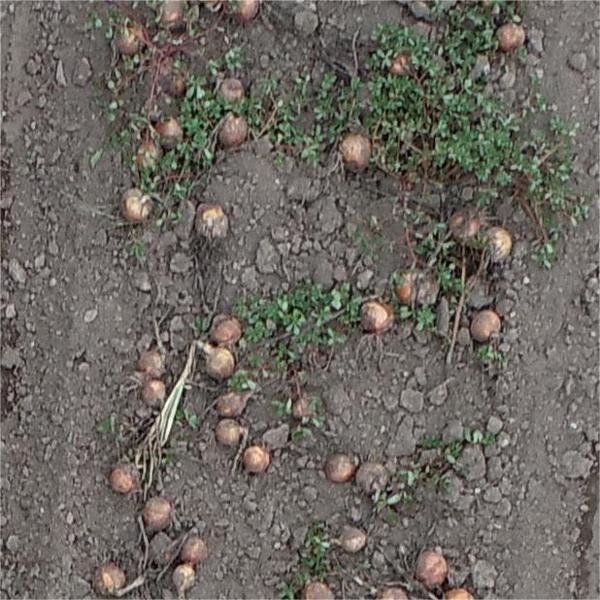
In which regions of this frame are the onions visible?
[217,390,243,416]
[138,495,172,531]
[138,346,163,375]
[324,450,354,480]
[336,128,370,167]
[177,532,207,562]
[204,346,235,378]
[443,583,475,599]
[295,394,323,421]
[228,0,260,22]
[107,463,137,493]
[132,141,164,171]
[152,114,178,142]
[141,379,165,402]
[396,268,436,303]
[496,23,523,52]
[213,418,243,447]
[217,76,244,102]
[467,309,498,342]
[340,525,364,550]
[122,189,154,222]
[389,49,413,74]
[453,210,480,239]
[94,560,124,593]
[113,19,144,53]
[357,460,387,493]
[162,69,187,96]
[196,203,227,233]
[484,226,512,258]
[415,549,447,582]
[374,579,406,599]
[159,0,188,30]
[210,314,240,343]
[214,113,245,147]
[169,563,196,590]
[305,579,331,599]
[358,298,393,333]
[240,443,268,472]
